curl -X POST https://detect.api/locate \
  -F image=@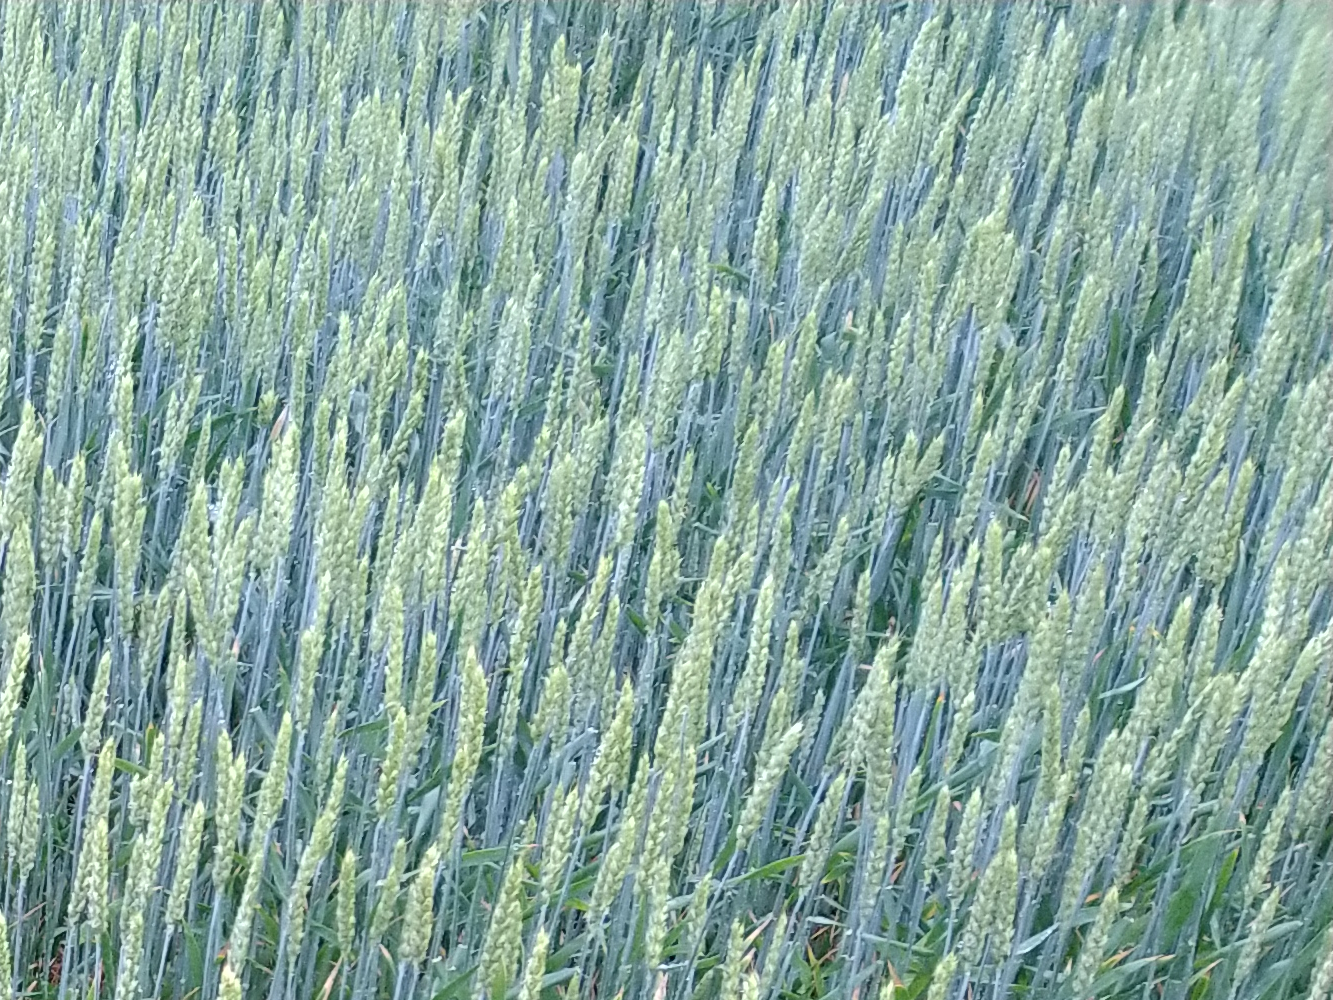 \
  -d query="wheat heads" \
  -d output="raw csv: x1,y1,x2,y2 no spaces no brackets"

745,576,777,710
974,17,994,56
1158,63,1196,135
591,598,621,693
1149,690,1208,785
219,179,239,272
806,8,846,88
397,482,416,532
895,17,942,106
216,544,232,607
525,274,545,327
499,933,550,1000
1096,467,1116,533
990,95,1014,153
117,13,134,41
1294,85,1328,179
610,135,623,169
1052,113,1066,151
146,735,164,803
707,537,726,587
383,0,407,53
641,324,666,426
814,371,834,451
255,147,277,214
655,30,671,96
1167,481,1220,579
601,508,616,553
138,588,172,676
1153,648,1188,732
1026,71,1057,154
904,595,923,685
520,126,542,192
1148,86,1163,182
993,61,1033,161
988,696,1020,803
325,757,350,835
584,370,601,408
467,669,489,775
1156,313,1178,383
1080,730,1116,823
0,406,36,525
822,205,839,249
60,110,84,194
552,786,579,871
1166,0,1174,38
796,243,818,313
1252,257,1301,355
997,101,1014,163
453,351,469,401
891,431,916,502
81,0,91,34
917,953,959,1000
262,26,276,89
136,209,158,280
1246,641,1289,746
145,0,156,23
1293,175,1326,235
728,422,761,511
460,130,482,202
2,30,14,99
493,660,524,759
368,399,426,490
408,471,440,579
1026,159,1060,248
948,790,982,894
227,228,238,332
543,785,565,898
333,179,364,262
286,896,302,962
419,839,441,882
1291,473,1333,578
93,817,107,931
790,9,818,96
541,418,574,508
586,132,619,180
74,219,86,268
228,755,246,838
653,331,678,447
155,102,181,175
1116,798,1149,879
0,530,20,616
9,148,30,222
315,708,336,781
943,690,977,772
813,99,834,160
466,202,479,262
438,91,453,139
740,448,765,520
509,567,543,659
814,214,844,282
991,235,1016,291
185,567,213,665
167,512,193,584
278,38,301,108
1068,0,1084,31
487,430,512,508
282,191,305,245
1044,595,1072,689
119,377,132,451
520,22,534,72
828,107,855,197
548,457,577,565
601,425,630,503
1024,622,1049,719
841,191,883,270
859,21,882,76
199,6,213,50
662,0,678,27
412,348,427,389
121,475,142,549
702,196,726,246
1196,474,1231,573
567,320,594,411
734,369,754,426
35,36,44,67
15,10,26,69
137,87,170,167
294,632,310,724
1306,95,1333,173
888,308,914,386
569,558,609,684
6,741,23,856
900,240,926,307
358,13,375,67
513,67,530,123
1104,91,1127,177
0,188,8,273
940,305,971,361
989,176,1016,234
733,719,798,844
137,28,159,81
414,115,422,167
974,318,1001,394
1126,100,1137,140
184,79,204,130
1282,22,1325,117
724,673,748,732
168,655,186,743
1027,776,1073,887
420,131,444,220
905,437,945,500
255,469,277,590
1082,191,1105,268
155,256,188,344
677,50,696,112
561,67,581,143
588,55,613,131
667,189,688,252
230,0,242,26
719,73,745,153
1073,533,1118,676
981,850,1015,974
588,232,600,283
1203,214,1214,257
935,247,970,342
26,279,41,344
186,412,212,508
474,869,512,1000
995,344,1019,384
88,737,116,822
318,153,332,203
707,584,721,618
658,749,696,859
698,0,717,33
1211,153,1234,193
381,58,401,121
450,528,476,620
1058,4,1097,115
853,281,872,329
1206,285,1220,348
293,219,319,292
1264,384,1298,484
1152,182,1172,224
380,610,406,701
451,89,473,144
643,38,656,103
764,343,787,425
187,291,207,368
208,268,227,330
221,512,258,625
897,101,924,196
424,27,443,79
403,163,419,204
952,433,991,536
589,391,601,423
346,104,365,153
77,146,98,215
645,552,664,631
244,224,258,300
1300,953,1333,1000
44,38,55,71
1036,203,1067,294
1051,281,1095,373
728,297,749,367
65,30,77,69
1258,174,1285,247
770,513,791,595
955,238,980,318
596,252,614,275
722,290,733,350
1076,291,1109,365
1101,61,1117,120
1049,494,1077,566
332,507,366,598
799,330,818,389
1211,358,1229,401
112,458,131,535
851,326,868,390
166,806,208,916
726,511,747,566
1233,27,1262,72
574,689,595,729
98,434,123,509
602,159,621,220
850,572,871,647
525,437,545,487
27,64,37,117
331,563,352,635
82,219,107,311
802,774,846,893
211,546,228,649
294,796,341,879
71,512,106,615
319,43,332,102
30,239,56,346
384,341,407,400
354,436,381,498
834,691,859,747
189,0,200,48
1026,549,1050,637
492,27,511,90
333,851,356,955
0,107,21,207
718,59,744,128
115,99,134,185
826,376,844,460
352,280,382,353
289,111,306,151
1035,446,1072,531
861,448,882,511
961,395,984,453
742,503,760,554
1054,19,1066,59
644,261,663,338
528,158,549,219
1132,446,1170,536
920,148,954,219
174,0,185,48
0,226,8,290
724,920,744,1000
577,711,621,824
857,0,880,37
115,912,149,1000
91,89,99,141
366,538,413,652
671,645,701,747
774,115,808,193
1256,544,1293,649
590,124,603,153
501,201,519,288
132,509,145,563
1126,223,1149,278
276,421,301,557
1269,240,1326,395
20,106,32,142
272,10,287,76
506,874,526,985
488,540,511,631
453,221,470,269
1169,370,1216,461
960,859,996,954
573,426,603,517
1136,8,1157,53
488,99,510,212
540,192,558,227
849,412,863,451
944,158,975,233
788,389,812,466
218,462,232,511
717,552,750,621
702,135,719,197
1009,559,1036,607
235,12,246,74
299,42,312,110
1266,203,1292,276
208,76,238,148
888,15,903,79
390,282,409,342
1218,60,1264,149
1214,191,1254,315
324,410,349,485
1256,469,1297,567
435,755,465,849
342,0,366,83
408,0,433,73
730,970,759,1000
1268,0,1301,36
312,230,335,322
435,365,454,452
671,451,696,529
616,134,637,216
311,574,333,668
396,210,412,274
652,153,671,201
804,195,829,254
120,235,140,324
917,579,945,681
311,405,330,513
1116,505,1142,589
384,22,402,53
489,307,517,397
255,0,277,55
395,838,407,876
364,339,389,447
1227,651,1261,720
1218,98,1229,130
1149,468,1183,536
1001,805,1016,857
1307,364,1333,439
141,780,176,886
1062,100,1091,202
456,646,475,759
1225,147,1262,226
412,633,436,758
1258,331,1289,397
1295,415,1333,524
693,192,703,226
209,820,234,883
241,0,252,34
701,290,722,370
1175,378,1244,531
1113,46,1132,120
236,159,247,184
957,542,980,601
89,0,98,35
617,0,633,19
1110,387,1125,442
1103,424,1155,518
68,229,93,310
1194,71,1211,117
1216,462,1256,577
519,254,535,303
1291,502,1333,610
239,177,249,252
745,9,783,88
497,299,514,348
1275,143,1298,181
1158,46,1184,80
999,247,1027,309
177,247,222,335
632,0,646,34
1131,124,1150,202
688,156,703,190
539,287,561,344
112,174,148,278
563,153,588,240
262,332,284,395
316,0,328,32
979,517,1004,617
424,195,450,255
11,192,29,283
215,730,232,840
684,223,702,269
920,788,950,872
693,236,711,318
1278,0,1318,46
859,806,884,920
246,260,270,343
116,24,142,99
398,870,432,955
174,375,202,456
882,310,912,395
34,113,55,169
360,97,374,152
968,80,996,142
14,24,39,106
1191,249,1211,345
0,636,33,755
847,74,871,130
362,88,390,172
40,468,55,561
167,590,188,689
1286,748,1328,836
67,0,77,30
813,157,828,209
467,13,482,51
471,495,487,538
1043,36,1074,121
0,909,10,1000
685,876,713,954
1068,889,1117,991
299,157,306,199
160,5,172,61
60,80,71,111
673,107,693,162
5,0,17,24
1177,251,1206,329
354,297,391,377
309,29,327,94
375,37,388,81
520,815,537,863
422,484,448,600
0,352,11,431
791,153,811,225
1086,764,1121,846
662,160,683,214
588,37,610,97
382,200,397,269
0,50,4,86
1107,730,1140,773
1061,821,1089,910
674,158,697,207
434,294,456,367
46,74,58,114
286,291,311,365
1030,306,1061,386
1202,3,1226,34
980,88,1008,149
373,0,384,38
263,233,274,267
335,153,354,192
918,35,940,88
529,695,546,737
875,43,891,86
443,145,464,237
390,136,410,198
329,57,342,84
576,165,602,260
65,459,86,554
635,767,672,891
1272,49,1299,113
714,153,741,230
846,647,899,751
760,912,786,1000
328,183,346,238
7,137,20,201
1293,280,1332,379
1011,17,1035,85
50,487,70,541
867,32,884,69
47,327,69,414
517,0,533,30
31,200,51,297
979,165,998,201
1189,605,1222,708
180,701,203,796
788,329,803,396
1076,146,1098,223
63,308,81,379
79,53,95,108
241,298,268,382
841,0,867,52
1183,678,1233,793
511,121,527,149
1229,891,1282,984
1280,8,1324,79
620,425,649,523
954,629,989,712
1140,355,1158,431
109,307,122,368
912,317,934,391
352,176,376,230
75,312,105,394
171,198,207,261
673,336,687,402
1005,546,1032,595
1214,45,1229,94
931,92,973,165
1243,335,1281,425
751,185,785,289
766,6,798,107
646,0,663,33
111,318,142,407
1318,47,1332,92
626,64,644,130
992,386,1010,455
858,104,881,160
620,353,640,429
248,111,272,175
372,486,399,582
947,33,966,95
1220,231,1253,353
798,688,827,775
1173,73,1198,169
422,122,430,158
539,71,551,131
546,97,560,158
373,708,408,812
126,773,147,821
1257,62,1275,109
113,547,134,638
21,435,46,519
1089,97,1101,147
1109,227,1134,292
863,313,886,412
118,834,144,921
973,226,994,309
1084,422,1107,523
1224,9,1238,41
61,682,71,726
753,345,773,407
1305,209,1324,254
1165,89,1188,145
942,579,966,682
303,0,315,40
1167,598,1194,649
1284,376,1316,469
178,38,199,136
248,774,271,854
1066,707,1089,785
653,638,689,752
68,834,95,916
807,284,831,348
48,127,65,194
158,28,178,86
380,96,402,193
619,256,647,344
1119,408,1142,456
867,683,897,811
323,200,336,233
522,222,539,256
478,285,497,344
20,0,34,24
610,679,631,792
649,862,676,978
781,484,799,523
192,483,209,591
406,64,425,132
510,316,535,396
873,99,914,191
541,363,565,446
172,135,196,188
554,34,567,97
333,9,350,55
657,64,680,128
1228,107,1258,195
227,13,238,71
1007,67,1048,166
733,87,754,143
1095,236,1113,277
1193,34,1207,71
1019,20,1048,89
79,106,91,152
699,648,715,737
889,394,907,423
158,392,179,477
818,520,848,605
1108,8,1128,67
32,0,44,22
154,195,176,275
1100,176,1130,237
686,327,709,376
1136,57,1150,94
18,780,42,875
870,459,893,544
271,712,293,822
104,0,120,53
546,664,567,741
711,239,729,313
352,557,367,633
851,458,864,498
1139,237,1161,329
102,131,123,206
507,520,523,618
441,405,468,477
342,647,359,701
995,172,1014,213
797,104,819,165
152,150,171,209
586,841,624,930
104,80,122,140
658,248,681,322
752,95,785,176
1132,656,1165,715
457,590,490,671
1091,767,1135,863
540,219,558,254
226,128,238,176
227,855,264,983
470,531,488,586
1163,332,1194,408
328,83,346,153
269,237,298,324
697,64,714,146
799,557,827,612
1241,790,1289,901
779,621,799,714
758,691,785,768
1187,145,1216,226
1270,638,1320,736
288,346,304,434
210,457,247,563
902,0,917,30
1015,787,1045,866
177,164,195,219
218,108,236,159
579,124,591,153
568,431,582,462
598,669,617,732
286,134,303,194
64,65,82,120
337,316,356,401
845,112,893,209
914,264,939,364
569,264,585,328
441,1,460,54
694,579,710,660
724,0,738,36
491,24,499,61
922,76,947,163
760,473,790,551
1038,684,1059,798
305,83,327,153
548,618,566,668
1181,27,1197,77
1005,377,1043,457
274,109,291,183
656,110,676,153
652,213,667,266
369,867,398,943
1188,90,1217,170
350,215,378,284
437,562,447,619
9,528,34,630
1298,33,1333,104
657,500,680,596
268,194,282,240
322,351,338,400
208,5,223,62
318,469,347,575
623,756,651,854
85,655,112,753
712,137,731,183
892,767,919,855
0,290,20,372
457,311,473,352
920,535,943,597
882,232,907,308
494,467,527,538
